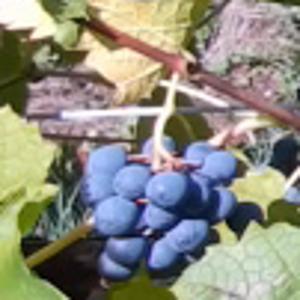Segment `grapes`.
Wrapping results in <instances>:
<instances>
[{
  "mask_svg": "<svg viewBox=\"0 0 300 300\" xmlns=\"http://www.w3.org/2000/svg\"><path fill=\"white\" fill-rule=\"evenodd\" d=\"M128 150L112 144L91 152L81 185L85 204L97 210L102 248L94 256L100 277L111 284L134 279L143 264L151 283L171 285L188 262H199L219 242L218 226L230 229L263 223L262 208L238 203L228 186L239 161L230 150L196 141L185 151L170 135L149 137L141 162L126 161Z\"/></svg>",
  "mask_w": 300,
  "mask_h": 300,
  "instance_id": "01657485",
  "label": "grapes"
}]
</instances>
